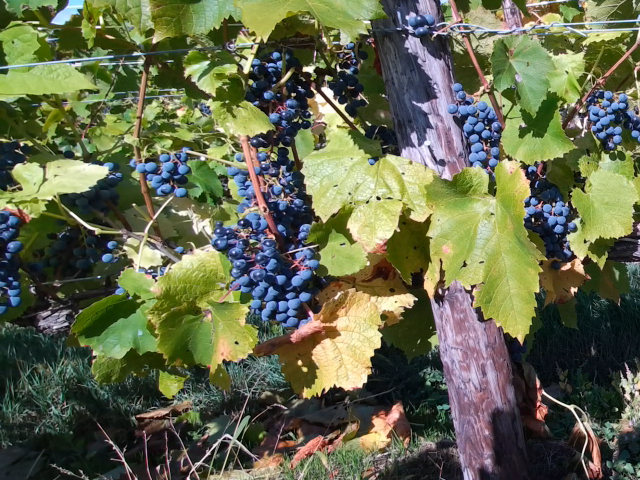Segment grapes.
Returning a JSON list of instances; mask_svg holds the SVG:
<instances>
[{
    "mask_svg": "<svg viewBox=\"0 0 640 480\" xmlns=\"http://www.w3.org/2000/svg\"><path fill=\"white\" fill-rule=\"evenodd\" d=\"M227 174L231 178H234V184L239 187L237 189V194L243 199L237 206V211L239 213H244L251 208V204L256 203L252 182L247 180V171L245 169H240L237 166H229L227 168Z\"/></svg>",
    "mask_w": 640,
    "mask_h": 480,
    "instance_id": "obj_12",
    "label": "grapes"
},
{
    "mask_svg": "<svg viewBox=\"0 0 640 480\" xmlns=\"http://www.w3.org/2000/svg\"><path fill=\"white\" fill-rule=\"evenodd\" d=\"M408 24L413 27L417 37H426L430 34V29L426 26H433L435 18L431 15L416 14L408 18Z\"/></svg>",
    "mask_w": 640,
    "mask_h": 480,
    "instance_id": "obj_13",
    "label": "grapes"
},
{
    "mask_svg": "<svg viewBox=\"0 0 640 480\" xmlns=\"http://www.w3.org/2000/svg\"><path fill=\"white\" fill-rule=\"evenodd\" d=\"M0 297L8 296L0 303V315H4L10 308H16L21 303V275L17 272L23 265L20 257L23 242L13 240L20 235V228L24 220L10 211H0Z\"/></svg>",
    "mask_w": 640,
    "mask_h": 480,
    "instance_id": "obj_6",
    "label": "grapes"
},
{
    "mask_svg": "<svg viewBox=\"0 0 640 480\" xmlns=\"http://www.w3.org/2000/svg\"><path fill=\"white\" fill-rule=\"evenodd\" d=\"M534 189L539 191L540 200L543 202L540 208L535 206L539 203L537 196L527 197L526 213L524 214V222L529 231L538 233V237L545 243V257L550 259L555 257L558 260H552L550 265L554 270H559L561 266L569 261L572 257V251L569 249V242H562L557 235H565L574 232L577 225L574 222L567 223V215L570 208L564 204L560 193V187L549 182L547 178L534 182Z\"/></svg>",
    "mask_w": 640,
    "mask_h": 480,
    "instance_id": "obj_3",
    "label": "grapes"
},
{
    "mask_svg": "<svg viewBox=\"0 0 640 480\" xmlns=\"http://www.w3.org/2000/svg\"><path fill=\"white\" fill-rule=\"evenodd\" d=\"M239 230L251 229L248 239L236 232L232 227H224L221 220H216L210 238L211 248L219 253L227 252V259L232 262L230 270L231 289L251 295V310L260 315L263 322L277 320L284 327L298 326L299 309L303 303L313 299L311 291L300 292L320 266L318 258H312L315 252L311 249L293 255L297 265L302 268L294 271L292 264L281 257L277 250V242L268 234L265 217L251 213L246 219L237 221ZM250 241L262 242L260 252L253 257L246 254Z\"/></svg>",
    "mask_w": 640,
    "mask_h": 480,
    "instance_id": "obj_1",
    "label": "grapes"
},
{
    "mask_svg": "<svg viewBox=\"0 0 640 480\" xmlns=\"http://www.w3.org/2000/svg\"><path fill=\"white\" fill-rule=\"evenodd\" d=\"M18 141L13 143H0V190L6 192L9 187H16L18 182L12 178L8 171L17 168L25 162V156L18 151Z\"/></svg>",
    "mask_w": 640,
    "mask_h": 480,
    "instance_id": "obj_11",
    "label": "grapes"
},
{
    "mask_svg": "<svg viewBox=\"0 0 640 480\" xmlns=\"http://www.w3.org/2000/svg\"><path fill=\"white\" fill-rule=\"evenodd\" d=\"M615 95L612 91L598 90L592 94L586 101V112L588 114V121L592 126L594 137L598 140L607 142L606 149L608 151L614 150L616 145H620L623 142V128L621 126H610V122H614L615 125H619L625 118L624 128L631 130V137L637 139L640 143V117H636L632 110H626L630 108L628 103V95L621 93L618 96L617 102H611L609 99H614ZM601 102H600V106L602 107V108H604V109H606V111H605V110H602L600 107L596 106V105H593V104H592V103H598V102H599V100H602V101H601Z\"/></svg>",
    "mask_w": 640,
    "mask_h": 480,
    "instance_id": "obj_5",
    "label": "grapes"
},
{
    "mask_svg": "<svg viewBox=\"0 0 640 480\" xmlns=\"http://www.w3.org/2000/svg\"><path fill=\"white\" fill-rule=\"evenodd\" d=\"M452 91L457 100H462V104L458 107L456 104L449 105L446 113L455 115L457 112L460 117L467 116L462 125L463 136L466 141H470L471 152L468 161L473 167L481 169L485 168L487 162V152L484 151L482 140H489L488 147L491 149V158L488 160L490 168H495L499 161V145L501 140L502 127L499 125L493 107L485 101H478L475 105L473 97H466L461 83H454Z\"/></svg>",
    "mask_w": 640,
    "mask_h": 480,
    "instance_id": "obj_4",
    "label": "grapes"
},
{
    "mask_svg": "<svg viewBox=\"0 0 640 480\" xmlns=\"http://www.w3.org/2000/svg\"><path fill=\"white\" fill-rule=\"evenodd\" d=\"M193 154L191 146H183L176 152L177 160L174 161L172 154L161 153L159 155V164L155 161H147L146 163H138L136 158L129 160V166L139 174L145 175V180L150 182V186L156 191V195L160 198H166L168 195L175 197H186L188 190L185 187H177L170 184V180H174L178 185H186L188 177L191 173V167L186 164L188 157Z\"/></svg>",
    "mask_w": 640,
    "mask_h": 480,
    "instance_id": "obj_7",
    "label": "grapes"
},
{
    "mask_svg": "<svg viewBox=\"0 0 640 480\" xmlns=\"http://www.w3.org/2000/svg\"><path fill=\"white\" fill-rule=\"evenodd\" d=\"M345 48L348 51H350L349 63L341 62L339 64V67L341 69H346L347 71L353 74H346L344 70H341L338 73V77L341 81H338V80L330 81L328 83V88L333 92L335 96H340L337 99V103L339 105H346L345 113L349 117L355 118L357 116V112L354 107H365L367 105V102L364 99H359V100H352L351 102L348 103V98L342 94L343 92H346L348 90V86L352 88L350 90V95L353 98H357L359 96V93H363L365 91L364 85L359 82V79L356 76L360 73V70L357 67L358 65L357 57L360 58L361 60H367L369 58V54L366 51H362V50H358L357 52H355L354 49L356 48V45L353 42H348L345 45Z\"/></svg>",
    "mask_w": 640,
    "mask_h": 480,
    "instance_id": "obj_9",
    "label": "grapes"
},
{
    "mask_svg": "<svg viewBox=\"0 0 640 480\" xmlns=\"http://www.w3.org/2000/svg\"><path fill=\"white\" fill-rule=\"evenodd\" d=\"M118 247H119V243L117 241L107 240L105 242V248L108 252H105L100 256V261L103 264H107V263H110L111 265L116 264L119 261V257L117 255L113 256L111 252H113Z\"/></svg>",
    "mask_w": 640,
    "mask_h": 480,
    "instance_id": "obj_14",
    "label": "grapes"
},
{
    "mask_svg": "<svg viewBox=\"0 0 640 480\" xmlns=\"http://www.w3.org/2000/svg\"><path fill=\"white\" fill-rule=\"evenodd\" d=\"M95 166H100L107 170L110 175L106 177L97 186H93L85 193L71 192L69 197L76 200V206L80 208L83 214H87L92 207L95 211H98L101 215H107L109 210L116 208L119 205V194L115 192V188L123 180V174L119 171V165L115 161H105L102 159H95L93 161Z\"/></svg>",
    "mask_w": 640,
    "mask_h": 480,
    "instance_id": "obj_8",
    "label": "grapes"
},
{
    "mask_svg": "<svg viewBox=\"0 0 640 480\" xmlns=\"http://www.w3.org/2000/svg\"><path fill=\"white\" fill-rule=\"evenodd\" d=\"M299 78L300 75L294 73L286 84V89L296 96L291 99L287 98L285 100L286 107L281 108L279 112H272L268 115L271 124L281 125L284 130L277 135V138L257 135L251 139V147L256 149H268L270 145L278 147L281 143L284 146L278 149L277 160H269L267 163H262L260 167H255V174L277 177L282 166V177L278 179V183L284 188V192L291 195L295 191V187L299 189L293 194V202L281 199L272 201L274 196L280 197L283 194V189L279 185L268 186L266 191L262 193L265 204L273 214L274 223L280 235L285 239L291 237L296 240L295 243H289L286 246L287 251L303 246V242L311 231V224L314 222L312 210L304 203L306 195L301 189L304 186L302 182L304 175L300 171H292L295 162L287 158L289 155L287 147L292 145V139L297 136L298 131L312 127L309 120H302L300 123L293 121L298 117L303 119L312 117V114L307 111L309 109L307 99L315 97V92L311 90L309 82Z\"/></svg>",
    "mask_w": 640,
    "mask_h": 480,
    "instance_id": "obj_2",
    "label": "grapes"
},
{
    "mask_svg": "<svg viewBox=\"0 0 640 480\" xmlns=\"http://www.w3.org/2000/svg\"><path fill=\"white\" fill-rule=\"evenodd\" d=\"M268 59L274 63L262 65L259 58H254L250 62V66L254 71L249 73V77L254 82L250 85V90L246 95V100L253 105H257L264 101L276 100L279 104L284 102L280 92L274 93L271 89L281 81L282 78V54L278 51H272L268 54Z\"/></svg>",
    "mask_w": 640,
    "mask_h": 480,
    "instance_id": "obj_10",
    "label": "grapes"
},
{
    "mask_svg": "<svg viewBox=\"0 0 640 480\" xmlns=\"http://www.w3.org/2000/svg\"><path fill=\"white\" fill-rule=\"evenodd\" d=\"M285 62V68L287 70H290L291 68H294L297 72L302 70L301 62L297 57H293V50L291 48L286 50Z\"/></svg>",
    "mask_w": 640,
    "mask_h": 480,
    "instance_id": "obj_15",
    "label": "grapes"
}]
</instances>
